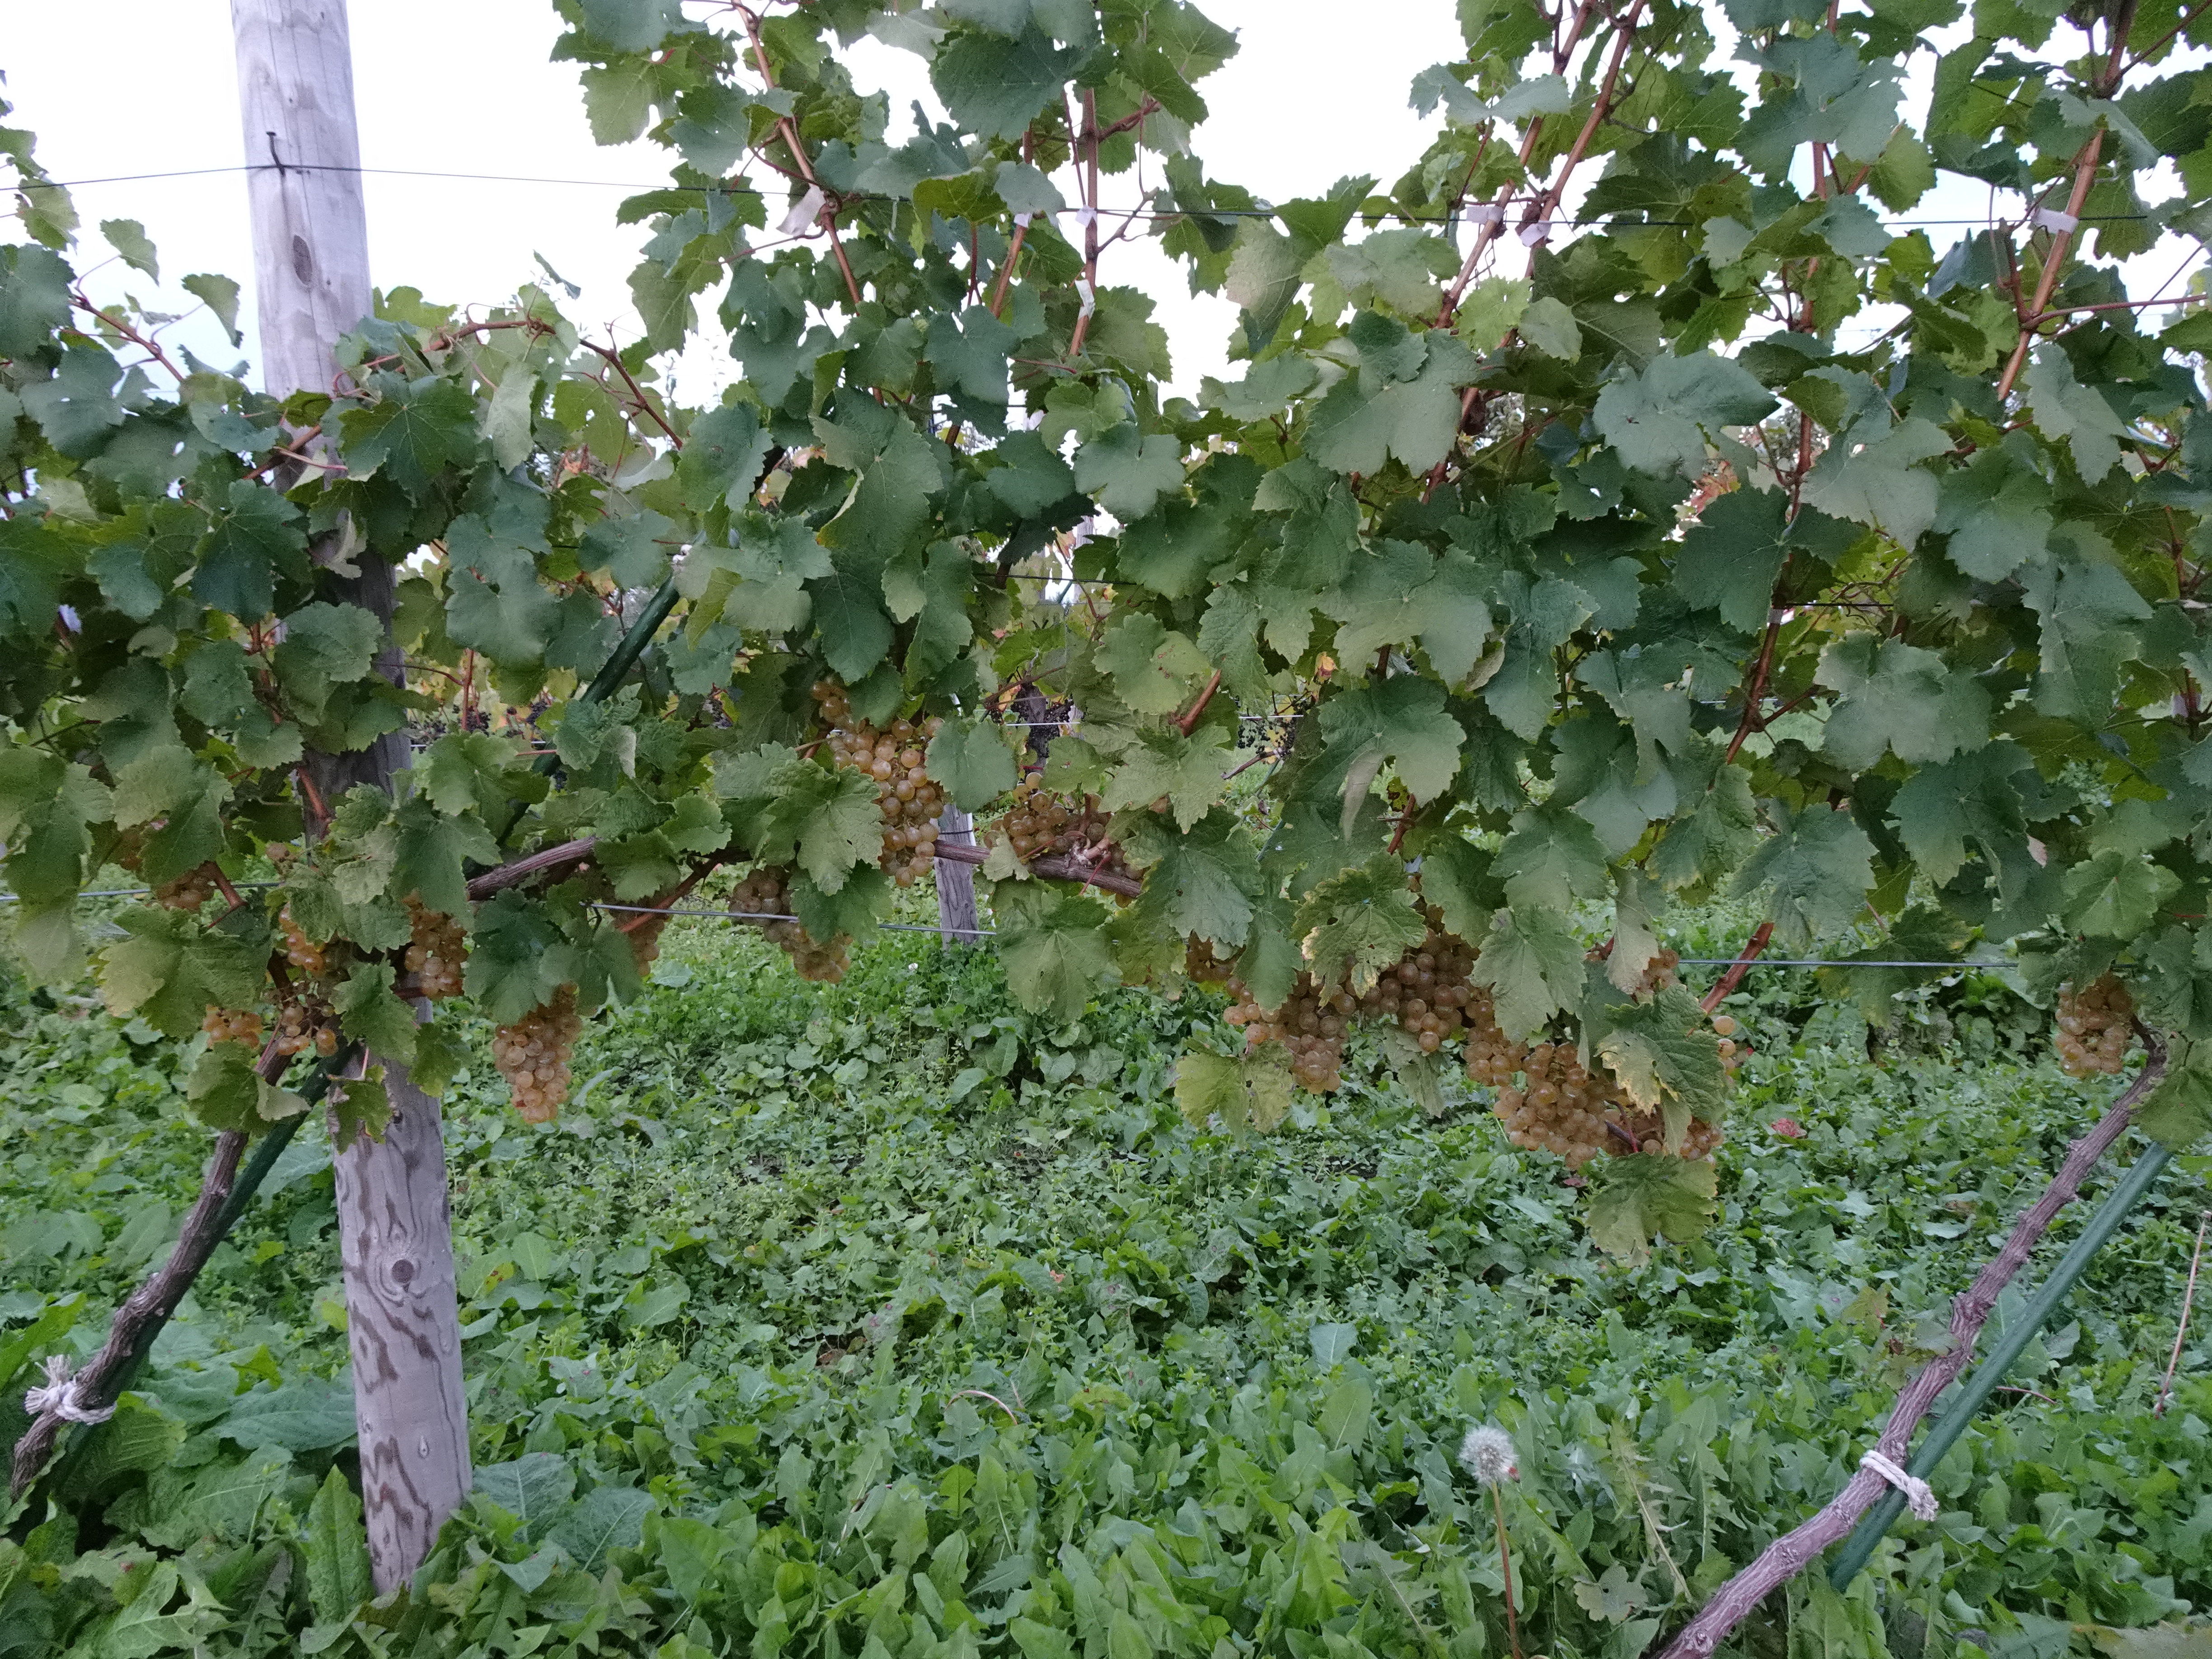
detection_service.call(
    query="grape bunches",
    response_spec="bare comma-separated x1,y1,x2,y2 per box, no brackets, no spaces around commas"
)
726,862,797,947
1083,788,1151,881
1274,967,1356,1094
271,997,340,1061
1224,977,1286,1045
879,824,944,888
434,695,496,738
279,898,327,975
614,903,676,980
504,696,551,730
830,730,892,796
112,822,152,874
1180,933,1236,985
1004,771,1071,852
492,981,582,1125
880,747,949,817
786,918,857,988
1493,1083,1611,1171
1465,989,1530,1086
202,1000,263,1051
1710,1013,1745,1080
884,712,948,746
551,748,573,787
807,672,868,735
1641,946,1685,990
1523,1035,1602,1113
1011,685,1065,755
155,858,220,914
2057,971,2135,1081
1639,1118,1729,1160
403,890,467,1000
1400,954,1472,1053
1343,972,1414,1025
